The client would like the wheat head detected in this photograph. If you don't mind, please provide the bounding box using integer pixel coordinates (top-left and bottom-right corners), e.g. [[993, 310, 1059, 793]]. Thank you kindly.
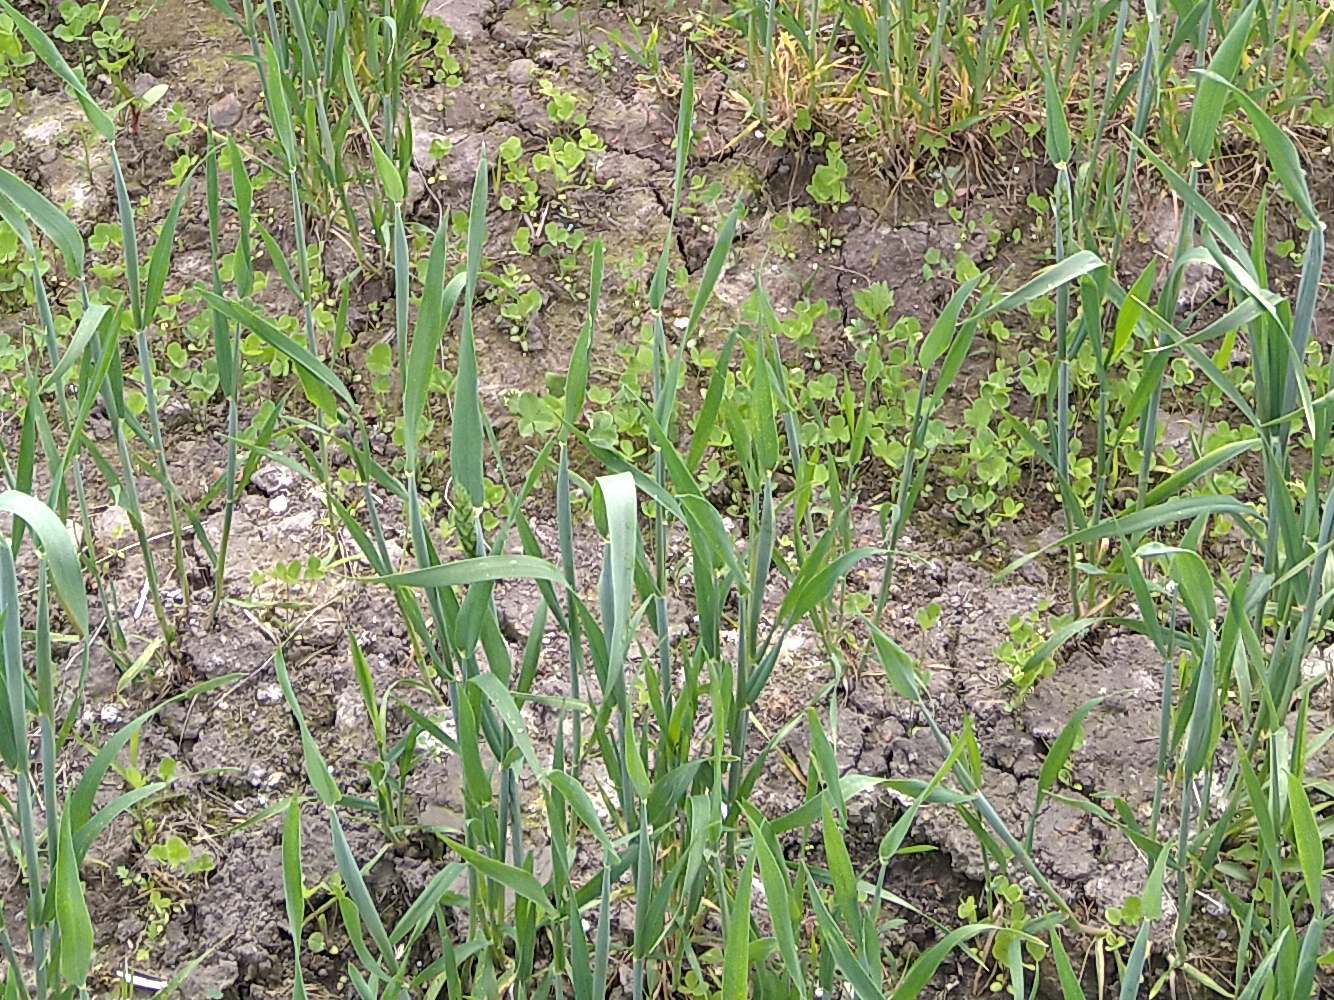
[[447, 478, 477, 556]]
